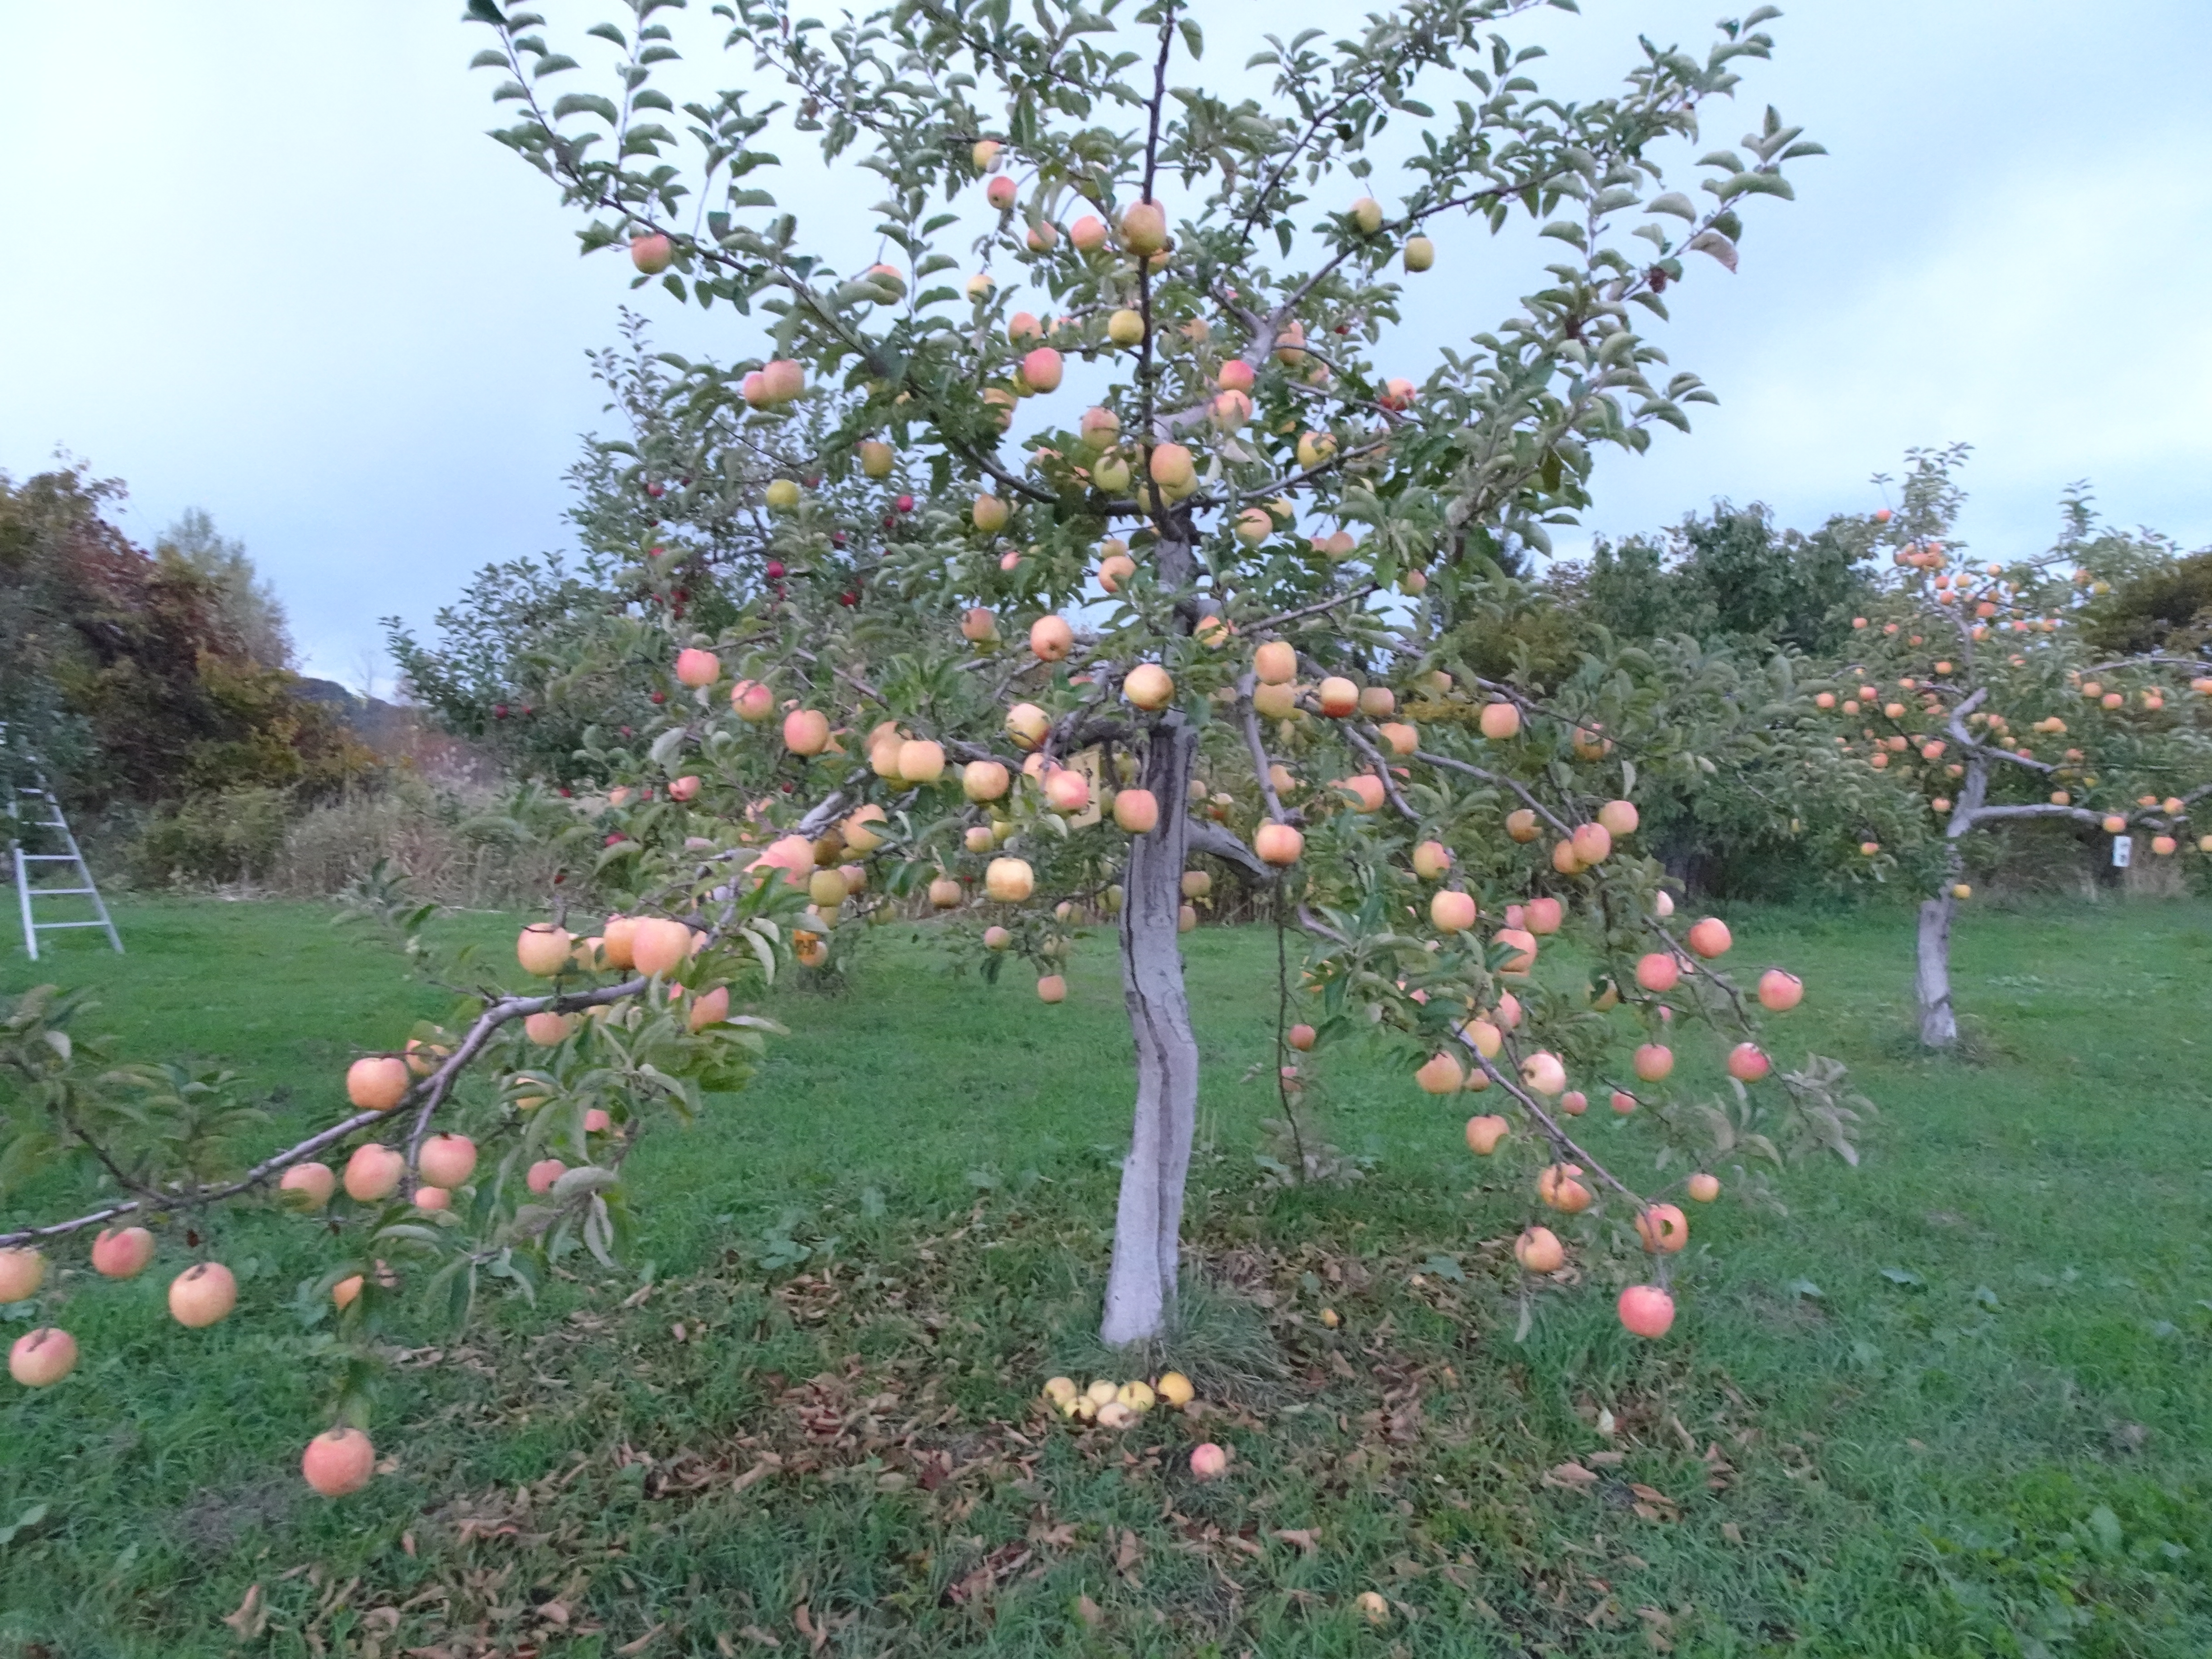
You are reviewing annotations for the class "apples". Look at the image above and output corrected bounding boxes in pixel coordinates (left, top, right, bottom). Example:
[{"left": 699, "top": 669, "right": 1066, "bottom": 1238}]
[
  {"left": 569, "top": 936, "right": 613, "bottom": 979},
  {"left": 1507, "top": 807, "right": 1545, "bottom": 845},
  {"left": 737, "top": 858, "right": 800, "bottom": 906},
  {"left": 1178, "top": 868, "right": 1213, "bottom": 898},
  {"left": 1659, "top": 948, "right": 1695, "bottom": 983},
  {"left": 1496, "top": 901, "right": 1526, "bottom": 934},
  {"left": 584, "top": 999, "right": 621, "bottom": 1035},
  {"left": 1273, "top": 334, "right": 1309, "bottom": 369},
  {"left": 524, "top": 1001, "right": 574, "bottom": 1050},
  {"left": 403, "top": 1020, "right": 463, "bottom": 1078},
  {"left": 863, "top": 898, "right": 898, "bottom": 927},
  {"left": 807, "top": 869, "right": 849, "bottom": 907},
  {"left": 1005, "top": 311, "right": 1044, "bottom": 356},
  {"left": 1169, "top": 316, "right": 1213, "bottom": 350},
  {"left": 417, "top": 1133, "right": 477, "bottom": 1188},
  {"left": 1115, "top": 205, "right": 1166, "bottom": 256},
  {"left": 1024, "top": 544, "right": 1048, "bottom": 569},
  {"left": 963, "top": 825, "right": 994, "bottom": 857},
  {"left": 1153, "top": 475, "right": 1201, "bottom": 515},
  {"left": 1066, "top": 464, "right": 1090, "bottom": 492},
  {"left": 1571, "top": 820, "right": 1613, "bottom": 867},
  {"left": 1035, "top": 447, "right": 1075, "bottom": 482},
  {"left": 331, "top": 1255, "right": 397, "bottom": 1320},
  {"left": 1087, "top": 883, "right": 1129, "bottom": 922},
  {"left": 1515, "top": 1052, "right": 1569, "bottom": 1100},
  {"left": 1391, "top": 905, "right": 1417, "bottom": 925},
  {"left": 882, "top": 387, "right": 912, "bottom": 413},
  {"left": 344, "top": 1055, "right": 410, "bottom": 1115},
  {"left": 1127, "top": 194, "right": 1167, "bottom": 228},
  {"left": 0, "top": 1242, "right": 46, "bottom": 1305},
  {"left": 1119, "top": 440, "right": 1149, "bottom": 466},
  {"left": 1412, "top": 1046, "right": 1467, "bottom": 1096},
  {"left": 735, "top": 819, "right": 767, "bottom": 851},
  {"left": 996, "top": 552, "right": 1028, "bottom": 577},
  {"left": 1093, "top": 456, "right": 1134, "bottom": 493},
  {"left": 865, "top": 262, "right": 905, "bottom": 307},
  {"left": 1552, "top": 836, "right": 1592, "bottom": 875},
  {"left": 1026, "top": 219, "right": 1058, "bottom": 257},
  {"left": 981, "top": 923, "right": 1012, "bottom": 955},
  {"left": 511, "top": 1070, "right": 557, "bottom": 1113},
  {"left": 1035, "top": 975, "right": 1071, "bottom": 1005},
  {"left": 781, "top": 697, "right": 803, "bottom": 721},
  {"left": 1104, "top": 308, "right": 1148, "bottom": 350},
  {"left": 1171, "top": 904, "right": 1199, "bottom": 934},
  {"left": 1401, "top": 236, "right": 1437, "bottom": 274},
  {"left": 1597, "top": 798, "right": 1641, "bottom": 841},
  {"left": 1444, "top": 994, "right": 1491, "bottom": 1041},
  {"left": 1460, "top": 1061, "right": 1492, "bottom": 1094},
  {"left": 998, "top": 500, "right": 1029, "bottom": 535},
  {"left": 1394, "top": 568, "right": 1430, "bottom": 599},
  {"left": 1297, "top": 358, "right": 1331, "bottom": 390},
  {"left": 1645, "top": 1002, "right": 1675, "bottom": 1029},
  {"left": 1755, "top": 968, "right": 1807, "bottom": 1014},
  {"left": 961, "top": 760, "right": 1011, "bottom": 802},
  {"left": 1477, "top": 990, "right": 1521, "bottom": 1035},
  {"left": 1200, "top": 357, "right": 1260, "bottom": 402},
  {"left": 836, "top": 862, "right": 871, "bottom": 896},
  {"left": 1097, "top": 555, "right": 1135, "bottom": 593},
  {"left": 796, "top": 939, "right": 829, "bottom": 971},
  {"left": 838, "top": 802, "right": 889, "bottom": 853},
  {"left": 1464, "top": 1114, "right": 1512, "bottom": 1158},
  {"left": 1312, "top": 677, "right": 1361, "bottom": 720},
  {"left": 1617, "top": 1282, "right": 1677, "bottom": 1338},
  {"left": 1021, "top": 750, "right": 1064, "bottom": 799},
  {"left": 1485, "top": 929, "right": 1537, "bottom": 972},
  {"left": 1632, "top": 1043, "right": 1675, "bottom": 1085},
  {"left": 1727, "top": 1039, "right": 1775, "bottom": 1081},
  {"left": 972, "top": 493, "right": 1010, "bottom": 537},
  {"left": 1350, "top": 453, "right": 1370, "bottom": 473},
  {"left": 1039, "top": 934, "right": 1071, "bottom": 959},
  {"left": 1390, "top": 513, "right": 1414, "bottom": 541},
  {"left": 675, "top": 647, "right": 724, "bottom": 689},
  {"left": 1248, "top": 812, "right": 1281, "bottom": 842},
  {"left": 1356, "top": 684, "right": 1398, "bottom": 724},
  {"left": 515, "top": 919, "right": 572, "bottom": 979},
  {"left": 1111, "top": 788, "right": 1160, "bottom": 835},
  {"left": 781, "top": 774, "right": 800, "bottom": 795},
  {"left": 1065, "top": 674, "right": 1099, "bottom": 705},
  {"left": 628, "top": 233, "right": 674, "bottom": 276},
  {"left": 1231, "top": 506, "right": 1273, "bottom": 548},
  {"left": 1630, "top": 1202, "right": 1689, "bottom": 1256},
  {"left": 1686, "top": 1167, "right": 1721, "bottom": 1206},
  {"left": 764, "top": 832, "right": 814, "bottom": 885},
  {"left": 965, "top": 273, "right": 999, "bottom": 307},
  {"left": 1524, "top": 895, "right": 1563, "bottom": 935},
  {"left": 1264, "top": 762, "right": 1302, "bottom": 797},
  {"left": 1286, "top": 866, "right": 1321, "bottom": 904},
  {"left": 1045, "top": 316, "right": 1085, "bottom": 354},
  {"left": 1559, "top": 1091, "right": 1588, "bottom": 1117},
  {"left": 1277, "top": 707, "right": 1318, "bottom": 748},
  {"left": 760, "top": 356, "right": 807, "bottom": 405},
  {"left": 1148, "top": 439, "right": 1193, "bottom": 490},
  {"left": 1383, "top": 979, "right": 1427, "bottom": 1017},
  {"left": 978, "top": 802, "right": 1030, "bottom": 839},
  {"left": 1585, "top": 974, "right": 1619, "bottom": 1013},
  {"left": 985, "top": 173, "right": 1019, "bottom": 211},
  {"left": 1511, "top": 1225, "right": 1565, "bottom": 1275},
  {"left": 927, "top": 876, "right": 964, "bottom": 909},
  {"left": 1608, "top": 1087, "right": 1638, "bottom": 1116},
  {"left": 411, "top": 1185, "right": 452, "bottom": 1215},
  {"left": 1079, "top": 405, "right": 1123, "bottom": 454},
  {"left": 1366, "top": 759, "right": 1415, "bottom": 798},
  {"left": 1571, "top": 717, "right": 1618, "bottom": 762},
  {"left": 1083, "top": 837, "right": 1138, "bottom": 881},
  {"left": 1205, "top": 387, "right": 1255, "bottom": 436},
  {"left": 1135, "top": 479, "right": 1174, "bottom": 519},
  {"left": 727, "top": 677, "right": 777, "bottom": 725},
  {"left": 1374, "top": 717, "right": 1420, "bottom": 760},
  {"left": 1296, "top": 429, "right": 1342, "bottom": 475},
  {"left": 1278, "top": 1066, "right": 1310, "bottom": 1095},
  {"left": 1634, "top": 952, "right": 1678, "bottom": 993},
  {"left": 782, "top": 706, "right": 830, "bottom": 759},
  {"left": 1327, "top": 530, "right": 1358, "bottom": 568},
  {"left": 1204, "top": 683, "right": 1237, "bottom": 717},
  {"left": 1302, "top": 797, "right": 1336, "bottom": 832},
  {"left": 1145, "top": 522, "right": 1169, "bottom": 542},
  {"left": 1286, "top": 1021, "right": 1316, "bottom": 1054},
  {"left": 1387, "top": 867, "right": 1419, "bottom": 898},
  {"left": 1264, "top": 496, "right": 1294, "bottom": 523},
  {"left": 1277, "top": 319, "right": 1306, "bottom": 344},
  {"left": 601, "top": 913, "right": 654, "bottom": 974},
  {"left": 610, "top": 1122, "right": 631, "bottom": 1147},
  {"left": 1137, "top": 244, "right": 1173, "bottom": 278},
  {"left": 575, "top": 1108, "right": 612, "bottom": 1143},
  {"left": 1687, "top": 915, "right": 1734, "bottom": 961},
  {"left": 976, "top": 397, "right": 1012, "bottom": 432},
  {"left": 1296, "top": 681, "right": 1323, "bottom": 710},
  {"left": 1254, "top": 680, "right": 1296, "bottom": 720},
  {"left": 804, "top": 899, "right": 840, "bottom": 930},
  {"left": 664, "top": 766, "right": 706, "bottom": 805},
  {"left": 1416, "top": 666, "right": 1455, "bottom": 694},
  {"left": 1300, "top": 955, "right": 1335, "bottom": 991},
  {"left": 865, "top": 373, "right": 893, "bottom": 407},
  {"left": 673, "top": 930, "right": 719, "bottom": 979},
  {"left": 521, "top": 1155, "right": 572, "bottom": 1199},
  {"left": 895, "top": 738, "right": 947, "bottom": 784},
  {"left": 1087, "top": 777, "right": 1117, "bottom": 816},
  {"left": 1324, "top": 311, "right": 1353, "bottom": 342},
  {"left": 746, "top": 798, "right": 782, "bottom": 830},
  {"left": 1301, "top": 535, "right": 1332, "bottom": 570},
  {"left": 1067, "top": 215, "right": 1108, "bottom": 254},
  {"left": 1320, "top": 773, "right": 1344, "bottom": 803},
  {"left": 691, "top": 882, "right": 733, "bottom": 917},
  {"left": 1264, "top": 402, "right": 1302, "bottom": 441},
  {"left": 630, "top": 918, "right": 695, "bottom": 982},
  {"left": 856, "top": 699, "right": 879, "bottom": 722},
  {"left": 856, "top": 442, "right": 894, "bottom": 481},
  {"left": 1374, "top": 373, "right": 1420, "bottom": 413},
  {"left": 7, "top": 1327, "right": 79, "bottom": 1389},
  {"left": 666, "top": 981, "right": 730, "bottom": 1044},
  {"left": 1189, "top": 611, "right": 1247, "bottom": 662},
  {"left": 1410, "top": 838, "right": 1455, "bottom": 880},
  {"left": 981, "top": 381, "right": 1017, "bottom": 418},
  {"left": 1430, "top": 889, "right": 1478, "bottom": 936},
  {"left": 1054, "top": 898, "right": 1086, "bottom": 929},
  {"left": 302, "top": 1427, "right": 377, "bottom": 1499},
  {"left": 277, "top": 1161, "right": 338, "bottom": 1216},
  {"left": 969, "top": 137, "right": 1005, "bottom": 175},
  {"left": 1027, "top": 615, "right": 1073, "bottom": 664},
  {"left": 90, "top": 1223, "right": 157, "bottom": 1280},
  {"left": 1416, "top": 936, "right": 1441, "bottom": 960},
  {"left": 1344, "top": 194, "right": 1384, "bottom": 237},
  {"left": 1367, "top": 427, "right": 1400, "bottom": 461},
  {"left": 626, "top": 1006, "right": 659, "bottom": 1035},
  {"left": 764, "top": 477, "right": 802, "bottom": 514},
  {"left": 1207, "top": 791, "right": 1235, "bottom": 823},
  {"left": 961, "top": 607, "right": 997, "bottom": 645},
  {"left": 1093, "top": 244, "right": 1119, "bottom": 270},
  {"left": 1340, "top": 774, "right": 1386, "bottom": 813},
  {"left": 1449, "top": 1019, "right": 1502, "bottom": 1063},
  {"left": 343, "top": 1142, "right": 406, "bottom": 1202},
  {"left": 1250, "top": 820, "right": 1304, "bottom": 871},
  {"left": 1540, "top": 1161, "right": 1594, "bottom": 1214},
  {"left": 871, "top": 738, "right": 909, "bottom": 780},
  {"left": 741, "top": 374, "right": 774, "bottom": 413},
  {"left": 1340, "top": 477, "right": 1376, "bottom": 511},
  {"left": 866, "top": 721, "right": 917, "bottom": 765},
  {"left": 1217, "top": 288, "right": 1246, "bottom": 319},
  {"left": 610, "top": 785, "right": 642, "bottom": 808},
  {"left": 1123, "top": 660, "right": 1176, "bottom": 713},
  {"left": 1644, "top": 888, "right": 1675, "bottom": 922},
  {"left": 1041, "top": 767, "right": 1091, "bottom": 818},
  {"left": 166, "top": 1260, "right": 238, "bottom": 1331},
  {"left": 1102, "top": 748, "right": 1143, "bottom": 787},
  {"left": 827, "top": 725, "right": 860, "bottom": 760},
  {"left": 1180, "top": 778, "right": 1207, "bottom": 810},
  {"left": 1099, "top": 537, "right": 1128, "bottom": 563},
  {"left": 1253, "top": 638, "right": 1299, "bottom": 688},
  {"left": 985, "top": 855, "right": 1035, "bottom": 906},
  {"left": 1002, "top": 703, "right": 1058, "bottom": 755},
  {"left": 1478, "top": 702, "right": 1521, "bottom": 742},
  {"left": 1020, "top": 348, "right": 1068, "bottom": 395}
]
